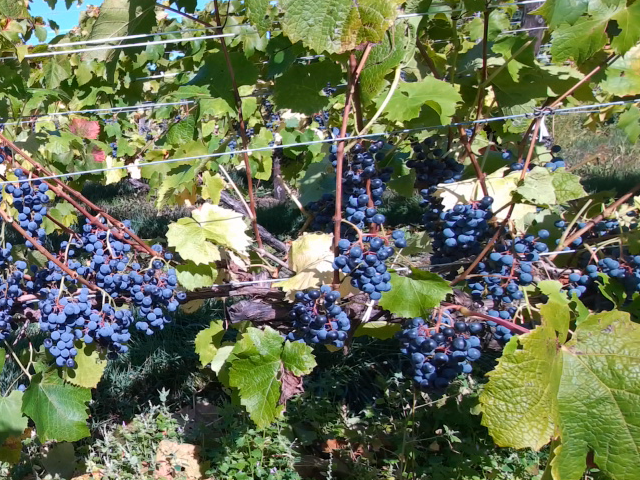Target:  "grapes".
<instances>
[{"label": "grapes", "instance_id": "4a4d1313", "mask_svg": "<svg viewBox=\"0 0 640 480\" xmlns=\"http://www.w3.org/2000/svg\"><path fill=\"white\" fill-rule=\"evenodd\" d=\"M12 247L13 244L11 242H7L4 249L0 247V269L5 268V262L13 261V257L10 255Z\"/></svg>", "mask_w": 640, "mask_h": 480}, {"label": "grapes", "instance_id": "83cd7487", "mask_svg": "<svg viewBox=\"0 0 640 480\" xmlns=\"http://www.w3.org/2000/svg\"><path fill=\"white\" fill-rule=\"evenodd\" d=\"M38 190L34 191L28 184L6 185L5 192L14 197L13 206L18 209L17 219L20 226L28 235L41 245L45 244L46 230L40 228L43 216L47 214V208L42 204L50 201V196L45 194L49 190L47 183L33 181Z\"/></svg>", "mask_w": 640, "mask_h": 480}, {"label": "grapes", "instance_id": "b958b902", "mask_svg": "<svg viewBox=\"0 0 640 480\" xmlns=\"http://www.w3.org/2000/svg\"><path fill=\"white\" fill-rule=\"evenodd\" d=\"M409 329H401L395 337L404 346L399 351L409 356L410 364L415 368L412 378L422 389L434 387L436 395H442L449 380L455 379L462 370L464 374L473 372L467 363L482 357L479 350L482 340L474 334L483 333L486 326L482 323L455 321L452 327H439L440 332L429 331L421 317H414ZM451 346L449 347V351L451 352L450 354H445L444 352H435L433 354V351H436L437 348H445L448 345V339L452 337L451 340ZM455 331L457 332V333H464V332H466V331H469L470 333H473V334H470V335H469V337H466V338H465V336H464V335H459L458 337H457V335L455 334Z\"/></svg>", "mask_w": 640, "mask_h": 480}, {"label": "grapes", "instance_id": "01657485", "mask_svg": "<svg viewBox=\"0 0 640 480\" xmlns=\"http://www.w3.org/2000/svg\"><path fill=\"white\" fill-rule=\"evenodd\" d=\"M82 226L83 233L79 234V239L73 238L71 243L76 248H82L88 253H94L90 267H83L79 261H66V266L75 270L80 275L87 276L95 272L96 285L104 287V290L111 297H117L119 293L128 292L129 298L135 302L139 309V315L147 320L135 322V316L129 309L116 310L110 303H104L102 310L112 316L113 324L109 320H104L98 309H91L92 302L88 300L89 287L82 285L79 290L78 301L68 302L65 297L59 299V304L63 307L62 312L53 313L54 301L59 296V290L51 287L46 288L52 281L59 282L62 277L67 282L77 285L79 280L62 270L58 265L48 261L46 267L39 271L37 264H32L30 269L35 276V281L28 279L26 288L31 292L38 293L42 300L38 302V309L41 311L39 317L40 330L43 333H50V338L43 340V346L49 349V353L56 356L58 367H72L74 359L78 354V349L74 346V339H82L86 344H92L95 339L101 337H111L112 348L119 353H126V344L131 340L129 327L134 323V328L144 331L148 336L155 334L156 328L164 330L172 322L170 315H163L161 307H153V299H158L170 311H176L181 301L188 297L185 290H178L174 295V290L179 286L177 282L176 270L169 268L167 273L160 276L163 285L158 287V279L154 278L156 270L163 268L161 260H154L152 268H148L143 275L138 273L142 268L140 262L132 264V271L129 274L115 273L123 271L125 264L129 263V258L124 255L131 251V246L117 240L109 235L110 246L114 257L109 258V251L103 250L102 240L106 239V231L98 230L93 232V226L86 217Z\"/></svg>", "mask_w": 640, "mask_h": 480}, {"label": "grapes", "instance_id": "34c12dc5", "mask_svg": "<svg viewBox=\"0 0 640 480\" xmlns=\"http://www.w3.org/2000/svg\"><path fill=\"white\" fill-rule=\"evenodd\" d=\"M392 238L395 240L394 245L396 248L405 249L407 247L406 233L402 228H397L392 231Z\"/></svg>", "mask_w": 640, "mask_h": 480}, {"label": "grapes", "instance_id": "ef6de9ee", "mask_svg": "<svg viewBox=\"0 0 640 480\" xmlns=\"http://www.w3.org/2000/svg\"><path fill=\"white\" fill-rule=\"evenodd\" d=\"M514 251L516 253H527L524 261L519 262V278L522 283L531 284L534 276L531 274L532 263L540 260V253L549 251V246L543 241H535L534 234L514 238Z\"/></svg>", "mask_w": 640, "mask_h": 480}, {"label": "grapes", "instance_id": "012428b0", "mask_svg": "<svg viewBox=\"0 0 640 480\" xmlns=\"http://www.w3.org/2000/svg\"><path fill=\"white\" fill-rule=\"evenodd\" d=\"M625 260L634 268L632 271L635 280L638 282L635 285L637 290H640V255H628L625 256Z\"/></svg>", "mask_w": 640, "mask_h": 480}, {"label": "grapes", "instance_id": "2adb6a1f", "mask_svg": "<svg viewBox=\"0 0 640 480\" xmlns=\"http://www.w3.org/2000/svg\"><path fill=\"white\" fill-rule=\"evenodd\" d=\"M482 280L484 284L480 281L467 283V288L471 290V295H480L486 286L489 291H492V293L485 295L487 300L512 303L513 300H521L524 298L523 292L520 291L518 283L513 278L509 279L510 283L506 285V290L500 285L502 283L500 277L483 276Z\"/></svg>", "mask_w": 640, "mask_h": 480}, {"label": "grapes", "instance_id": "91a60905", "mask_svg": "<svg viewBox=\"0 0 640 480\" xmlns=\"http://www.w3.org/2000/svg\"><path fill=\"white\" fill-rule=\"evenodd\" d=\"M596 264L611 278L625 279L628 275L627 269L612 257L599 258Z\"/></svg>", "mask_w": 640, "mask_h": 480}, {"label": "grapes", "instance_id": "54f908b8", "mask_svg": "<svg viewBox=\"0 0 640 480\" xmlns=\"http://www.w3.org/2000/svg\"><path fill=\"white\" fill-rule=\"evenodd\" d=\"M585 270L588 272V274L581 275L578 272H572L569 274L568 280L570 283H580V285H577L576 287L574 284H571L568 287L567 295L569 297L573 296L572 292L576 293L578 297H581L582 294L587 291L586 285L591 282V279H597L600 276V271L595 264H588L585 267Z\"/></svg>", "mask_w": 640, "mask_h": 480}, {"label": "grapes", "instance_id": "1ff8f66d", "mask_svg": "<svg viewBox=\"0 0 640 480\" xmlns=\"http://www.w3.org/2000/svg\"><path fill=\"white\" fill-rule=\"evenodd\" d=\"M506 245H499L497 251L490 253L491 261H498L499 270L494 269L490 271L484 262H479L477 265V272L481 275H501L510 276L511 267L514 266V257L511 254H502L503 252L510 251L513 248V240L511 238L505 239Z\"/></svg>", "mask_w": 640, "mask_h": 480}, {"label": "grapes", "instance_id": "e5b3c951", "mask_svg": "<svg viewBox=\"0 0 640 480\" xmlns=\"http://www.w3.org/2000/svg\"><path fill=\"white\" fill-rule=\"evenodd\" d=\"M14 266L17 270L10 277L3 280V277L0 276V339L11 335V315L27 308H35L33 303L22 302L20 304L16 301V297H20L23 294L21 280L24 279V272L28 269V263L19 259L14 262Z\"/></svg>", "mask_w": 640, "mask_h": 480}, {"label": "grapes", "instance_id": "f8a65327", "mask_svg": "<svg viewBox=\"0 0 640 480\" xmlns=\"http://www.w3.org/2000/svg\"><path fill=\"white\" fill-rule=\"evenodd\" d=\"M324 295L325 314L318 315L315 312V300ZM295 297L299 300L294 303L289 312L291 325L299 329V333L289 331L284 333V340L298 341L300 344H327L336 348H343L349 338L352 329V321L348 313L335 301L341 297L338 289H333L328 284L318 290H298Z\"/></svg>", "mask_w": 640, "mask_h": 480}, {"label": "grapes", "instance_id": "0513c4c2", "mask_svg": "<svg viewBox=\"0 0 640 480\" xmlns=\"http://www.w3.org/2000/svg\"><path fill=\"white\" fill-rule=\"evenodd\" d=\"M423 146L417 144L414 151L418 153L416 158L424 160L426 154L421 152ZM416 159H408L405 161L406 167L415 168L418 180L414 183L415 188H420L422 198L419 201L420 207L428 209L422 217L424 222L445 221L443 224L444 245L446 247H460L467 249L470 244L476 241L491 239L496 234L498 226L495 228L492 224H488L493 217L491 205L494 203L493 196H483L480 203L475 205L456 204L447 211L443 210V199L430 195L437 190V185L441 183H455L456 179H460L462 171L465 169L464 164H459L453 157H449L444 163L439 159H431L421 162Z\"/></svg>", "mask_w": 640, "mask_h": 480}, {"label": "grapes", "instance_id": "5460f4e3", "mask_svg": "<svg viewBox=\"0 0 640 480\" xmlns=\"http://www.w3.org/2000/svg\"><path fill=\"white\" fill-rule=\"evenodd\" d=\"M362 243L370 244L369 250L376 254H364L360 247L352 246L349 238L339 240V256L334 258L332 268L350 274V285L369 294L371 300H381L383 292L393 289L390 271L385 260L392 257L395 248L383 245V239L376 236L362 237Z\"/></svg>", "mask_w": 640, "mask_h": 480}, {"label": "grapes", "instance_id": "83beee25", "mask_svg": "<svg viewBox=\"0 0 640 480\" xmlns=\"http://www.w3.org/2000/svg\"><path fill=\"white\" fill-rule=\"evenodd\" d=\"M451 313L450 309H445L444 310V314L441 316L440 322L446 324L447 326H451L452 325V321L447 317L449 316Z\"/></svg>", "mask_w": 640, "mask_h": 480}, {"label": "grapes", "instance_id": "84f90ec7", "mask_svg": "<svg viewBox=\"0 0 640 480\" xmlns=\"http://www.w3.org/2000/svg\"><path fill=\"white\" fill-rule=\"evenodd\" d=\"M385 146L383 140H376L368 145L369 152L362 153V144L355 143L352 146L351 153L353 161L349 162L348 158H343V199L345 206V218L355 223L359 229L365 228V221L383 225L386 223V216L383 213H377L376 208L367 206L369 202L366 188L362 187L366 182V178H370V192L374 200L375 206L383 204L381 197L387 189V185L391 182V175L395 173L392 166H384L380 168V173L376 174L375 161L371 154H375L377 162L385 160V154L379 152Z\"/></svg>", "mask_w": 640, "mask_h": 480}, {"label": "grapes", "instance_id": "dcf779d0", "mask_svg": "<svg viewBox=\"0 0 640 480\" xmlns=\"http://www.w3.org/2000/svg\"><path fill=\"white\" fill-rule=\"evenodd\" d=\"M619 226V222L616 219L609 220H600L593 227V232L601 237H606L608 235V231L612 232L616 230Z\"/></svg>", "mask_w": 640, "mask_h": 480}, {"label": "grapes", "instance_id": "802abce8", "mask_svg": "<svg viewBox=\"0 0 640 480\" xmlns=\"http://www.w3.org/2000/svg\"><path fill=\"white\" fill-rule=\"evenodd\" d=\"M486 325L495 328L494 337L496 339H502L503 341H509L514 336V333L506 326L498 324L494 320H486Z\"/></svg>", "mask_w": 640, "mask_h": 480}, {"label": "grapes", "instance_id": "62ce99fe", "mask_svg": "<svg viewBox=\"0 0 640 480\" xmlns=\"http://www.w3.org/2000/svg\"><path fill=\"white\" fill-rule=\"evenodd\" d=\"M329 155L328 160L331 163L332 167L335 168L336 154H337V145L329 146Z\"/></svg>", "mask_w": 640, "mask_h": 480}, {"label": "grapes", "instance_id": "9fbda902", "mask_svg": "<svg viewBox=\"0 0 640 480\" xmlns=\"http://www.w3.org/2000/svg\"><path fill=\"white\" fill-rule=\"evenodd\" d=\"M517 312V307H509L508 310H494L488 309L487 314L493 317H499L501 320H510L514 317V313Z\"/></svg>", "mask_w": 640, "mask_h": 480}, {"label": "grapes", "instance_id": "23402543", "mask_svg": "<svg viewBox=\"0 0 640 480\" xmlns=\"http://www.w3.org/2000/svg\"><path fill=\"white\" fill-rule=\"evenodd\" d=\"M546 167H552L553 171H557L559 167L565 166V161L561 157H556L550 162L545 163Z\"/></svg>", "mask_w": 640, "mask_h": 480}]
</instances>
